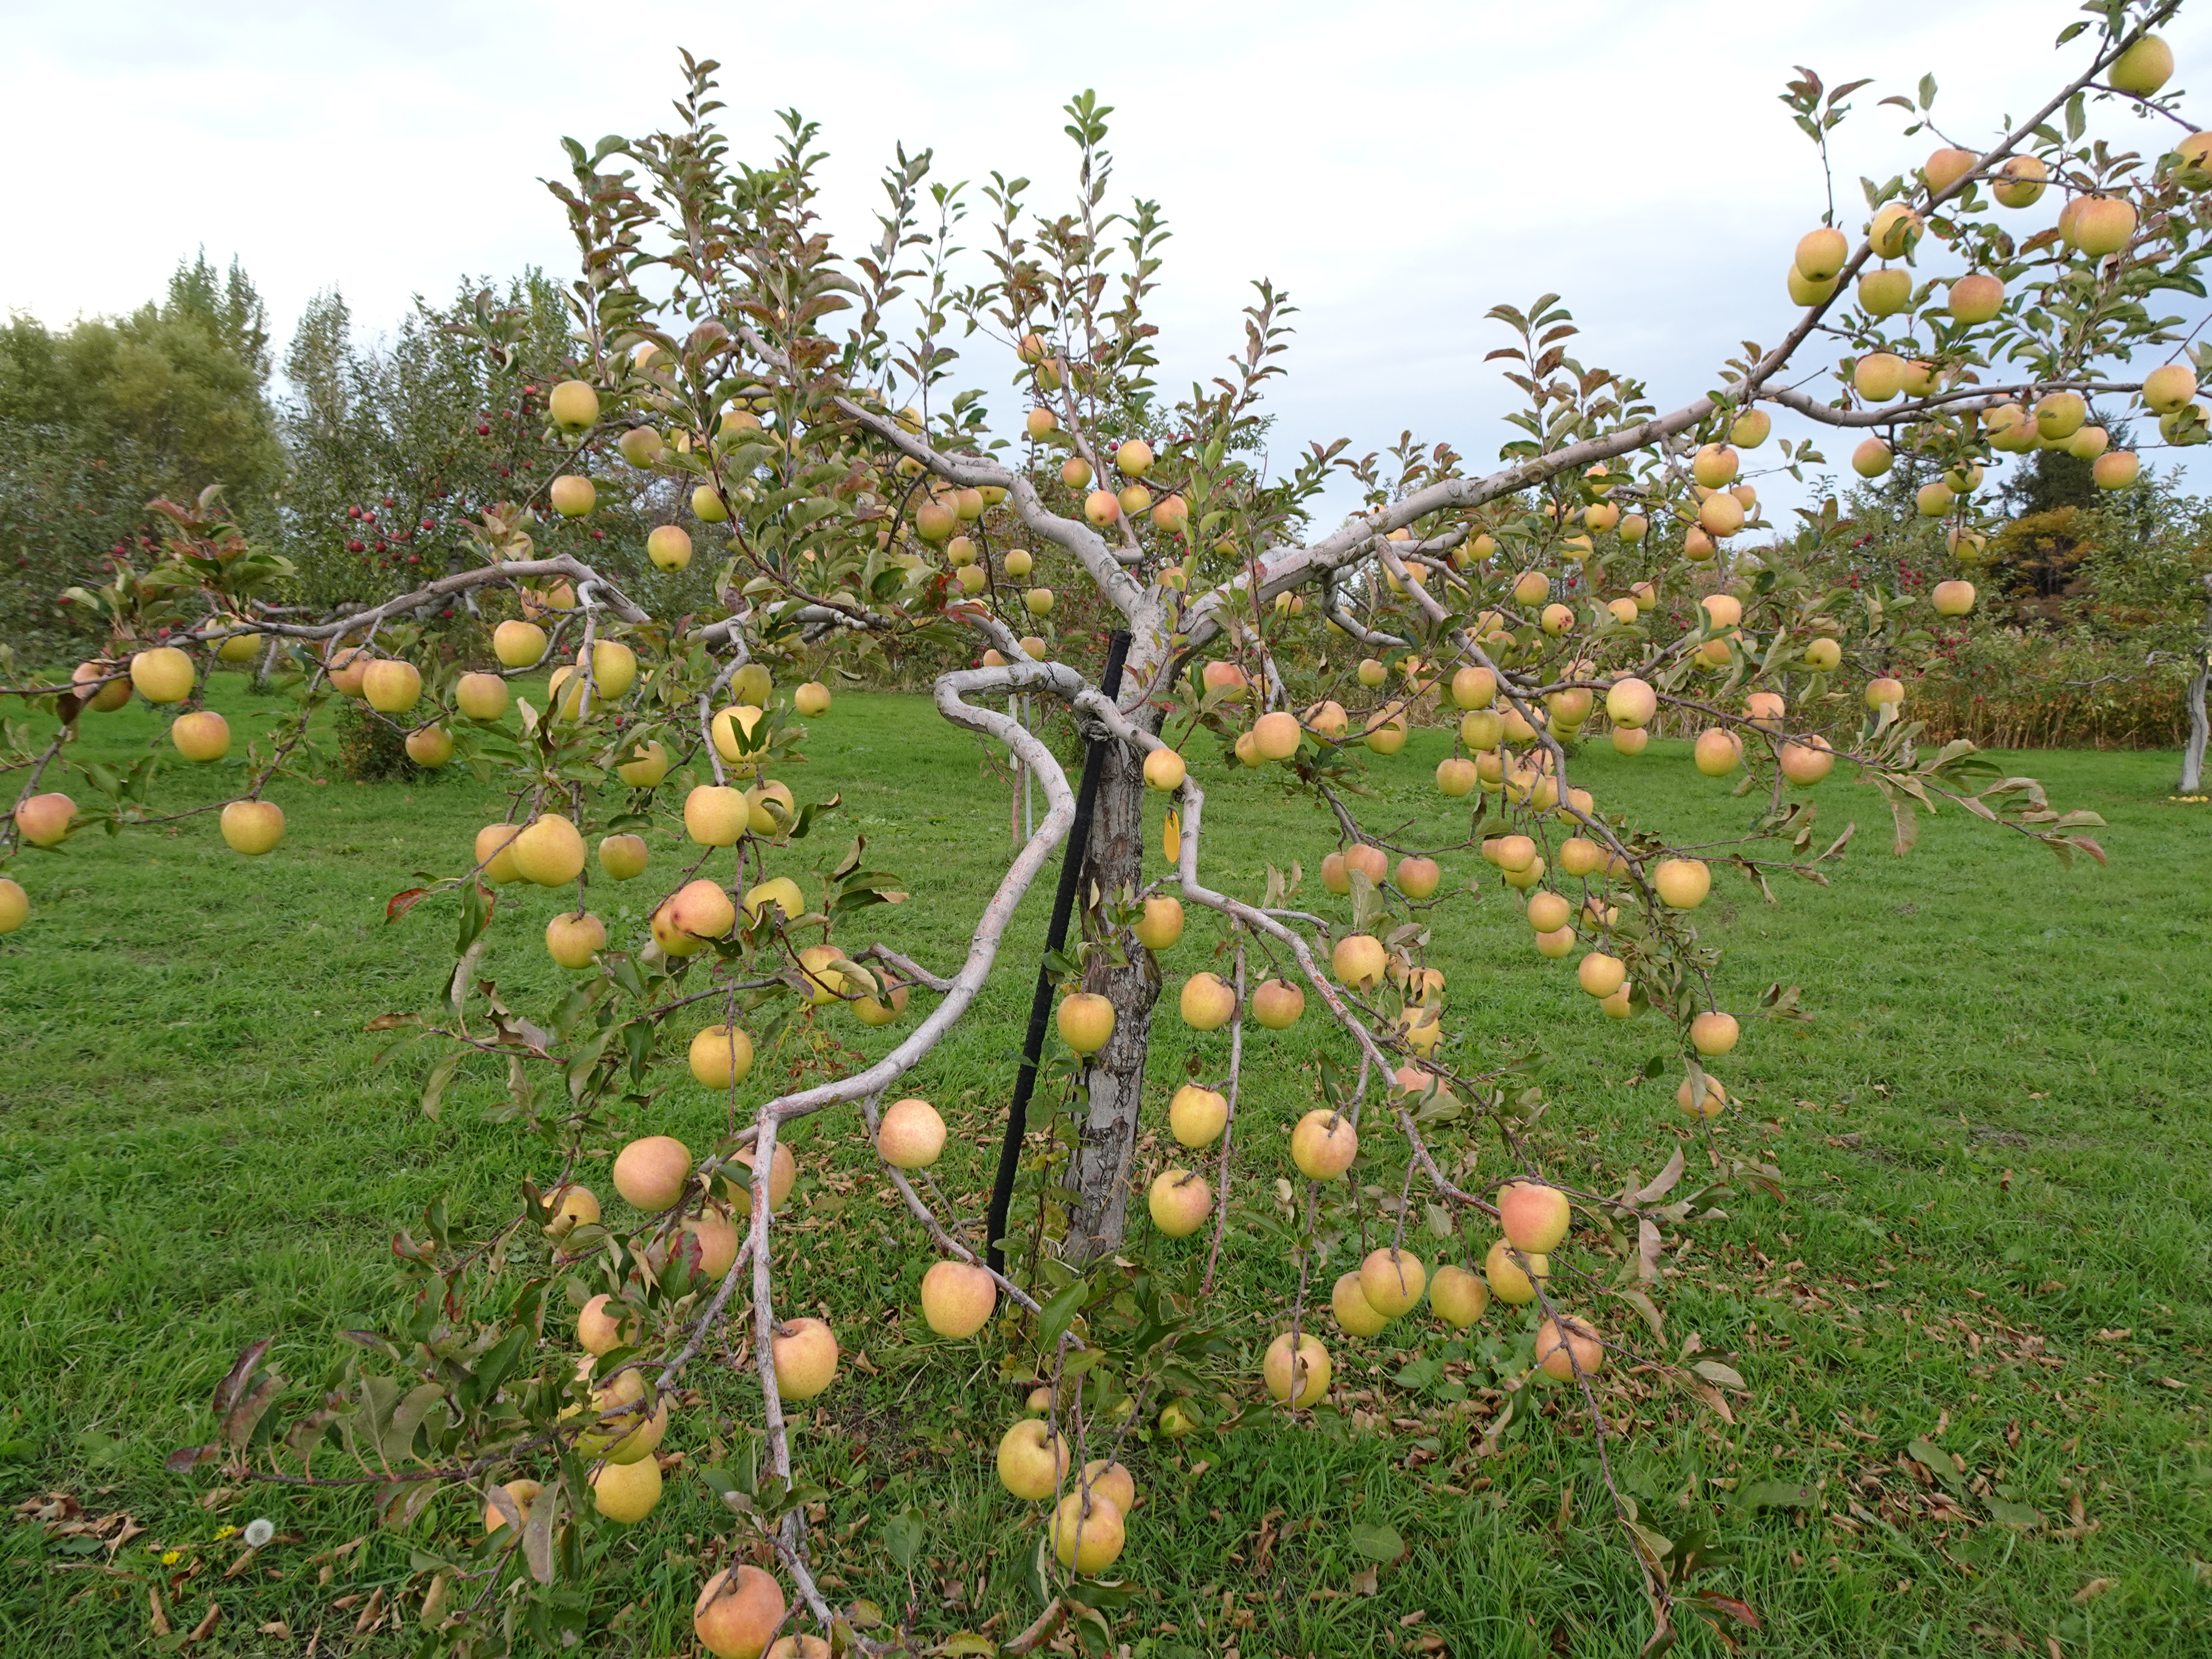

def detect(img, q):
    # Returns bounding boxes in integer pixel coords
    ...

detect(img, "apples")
[362,659,422,713]
[890,553,927,588]
[1507,770,1548,807]
[204,611,261,664]
[1794,228,1849,283]
[1144,438,1157,448]
[1475,744,1515,784]
[860,505,910,545]
[1401,1026,1448,1068]
[658,659,701,706]
[1498,1185,1572,1255]
[2174,130,2212,194]
[795,679,834,719]
[1056,992,1117,1054]
[1151,492,1190,533]
[1332,1269,1392,1335]
[861,387,888,415]
[673,766,698,791]
[1582,464,1618,497]
[456,672,509,718]
[902,451,931,483]
[1024,1386,1067,1427]
[1502,702,1548,754]
[1387,1006,1442,1056]
[1363,713,1409,756]
[1048,1491,1125,1574]
[403,720,454,769]
[577,638,638,700]
[1500,1175,1539,1217]
[1226,477,1236,487]
[710,704,773,764]
[585,1447,664,1527]
[636,387,677,415]
[649,894,706,956]
[1129,893,1185,950]
[1700,492,1748,538]
[1182,546,1198,557]
[1701,627,1745,665]
[1993,154,2049,209]
[1252,978,1306,1031]
[1529,773,1568,814]
[1275,591,1305,618]
[614,735,669,790]
[799,547,837,585]
[1673,498,1704,525]
[1921,147,1979,198]
[669,1207,738,1284]
[1383,526,1419,548]
[717,411,764,460]
[1108,1392,1138,1428]
[1063,1312,1089,1341]
[1780,733,1835,787]
[921,1259,998,1340]
[670,647,719,683]
[1913,579,1923,586]
[489,530,536,571]
[674,879,737,951]
[1693,442,1740,489]
[1203,660,1249,703]
[1384,943,1412,983]
[848,964,910,1027]
[549,381,598,434]
[1390,1066,1449,1123]
[1017,332,1048,364]
[634,344,677,386]
[730,663,773,707]
[520,575,574,627]
[1004,548,1035,579]
[971,658,983,670]
[2159,403,2211,447]
[1597,839,1633,883]
[1358,658,1390,687]
[1729,409,1773,450]
[1036,358,1067,391]
[493,619,548,668]
[1333,935,1386,991]
[693,1565,785,1659]
[1584,499,1620,535]
[546,911,608,970]
[1251,670,1280,703]
[1480,838,1512,867]
[1245,645,1273,666]
[1544,688,1595,724]
[1692,1011,1741,1056]
[1986,402,2039,452]
[1459,626,1491,658]
[774,305,801,326]
[572,1360,648,1438]
[1691,634,1725,671]
[1850,436,1896,480]
[1108,441,1119,451]
[1858,267,1913,317]
[171,710,231,762]
[926,489,960,522]
[1322,851,1359,896]
[1073,1460,1136,1524]
[1558,532,1595,563]
[1292,1107,1360,1184]
[1550,717,1581,744]
[1607,677,1658,730]
[1072,361,1102,396]
[1304,700,1349,749]
[1869,202,1925,261]
[558,1383,644,1460]
[1947,526,1987,560]
[2076,199,2137,259]
[2107,33,2176,100]
[1733,485,1758,513]
[955,561,988,597]
[577,1292,642,1362]
[1486,630,1519,657]
[916,500,956,541]
[768,427,802,462]
[1635,483,1671,511]
[1026,406,1059,443]
[1168,1082,1229,1149]
[1614,723,1650,759]
[1502,853,1547,891]
[1084,489,1121,528]
[1945,456,1985,495]
[764,1635,840,1659]
[744,876,806,941]
[794,460,836,498]
[1979,389,2021,427]
[1511,746,1555,781]
[794,945,849,1006]
[1564,657,1597,687]
[997,1418,1071,1503]
[626,1230,647,1251]
[1165,430,1177,441]
[1543,495,1577,525]
[1067,489,1081,502]
[328,649,379,699]
[897,405,924,438]
[1464,533,1496,563]
[1406,660,1443,695]
[741,777,795,838]
[973,473,1011,506]
[726,487,757,511]
[1619,514,1651,543]
[1916,415,1949,446]
[599,832,650,884]
[1540,602,1576,640]
[947,535,978,569]
[613,716,628,726]
[2034,393,2087,440]
[1116,439,1155,478]
[1254,712,1302,760]
[1155,566,1189,597]
[674,615,717,650]
[1513,572,1552,606]
[837,436,867,461]
[1560,837,1601,877]
[1368,504,1394,528]
[875,455,894,474]
[1678,1074,1727,1120]
[1791,1100,1820,1123]
[2059,193,2118,250]
[730,760,764,779]
[1436,757,1478,799]
[1864,678,1906,713]
[661,1451,695,1478]
[967,598,991,616]
[2142,364,2198,416]
[1787,263,1841,308]
[716,737,773,771]
[735,475,763,498]
[1359,1247,1427,1318]
[877,1097,948,1170]
[1741,692,1786,738]
[1527,890,1572,932]
[1159,1400,1208,1445]
[678,432,717,471]
[1161,655,1194,691]
[1179,971,1237,1031]
[475,822,527,885]
[550,474,596,518]
[1400,967,1448,1009]
[1397,855,1441,900]
[1691,483,1717,507]
[642,1233,703,1295]
[1441,539,1467,574]
[1062,456,1093,489]
[597,1391,671,1465]
[1947,275,2006,325]
[486,1478,558,1552]
[1480,770,1507,794]
[1653,857,1712,910]
[730,381,773,416]
[1916,481,1955,517]
[952,488,984,520]
[1606,598,1639,628]
[689,1024,756,1088]
[1474,610,1507,639]
[1699,595,1744,634]
[1932,581,1977,616]
[844,461,876,496]
[1212,527,1245,560]
[1486,1236,1551,1305]
[1181,432,1194,443]
[1581,896,1620,932]
[1067,513,1080,524]
[1853,353,1908,403]
[1169,532,1190,546]
[541,1185,602,1248]
[614,1135,694,1212]
[1026,587,1055,615]
[1459,708,1506,750]
[762,1317,839,1402]
[1695,727,1745,777]
[1387,560,1428,596]
[1264,1331,1332,1411]
[515,811,587,887]
[1557,788,1595,828]
[1575,557,1608,596]
[1452,666,1499,710]
[1536,920,1576,959]
[795,386,822,423]
[1235,729,1268,769]
[559,644,571,657]
[220,798,287,856]
[2068,425,2109,460]
[551,1248,581,1271]
[976,649,1012,672]
[1577,950,1627,1000]
[1129,568,1153,589]
[1804,637,1843,673]
[618,422,665,469]
[1018,636,1047,663]
[1630,581,1659,612]
[776,618,799,645]
[1444,576,1478,604]
[1430,1264,1495,1329]
[1600,982,1642,1019]
[1327,605,1356,636]
[930,479,958,508]
[2036,425,2074,455]
[2091,449,2141,492]
[648,525,692,573]
[2149,208,2179,239]
[691,483,733,525]
[0,879,32,935]
[1116,484,1152,519]
[1344,842,1389,891]
[685,784,750,847]
[549,665,609,721]
[1685,530,1721,560]
[1149,1169,1215,1237]
[14,792,80,850]
[1143,746,1186,792]
[132,646,194,704]
[1756,1122,1787,1144]
[1900,358,1947,399]
[720,1135,796,1218]
[1498,834,1537,872]
[1694,688,1704,698]
[1384,701,1409,722]
[71,657,133,713]
[1536,1315,1603,1383]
